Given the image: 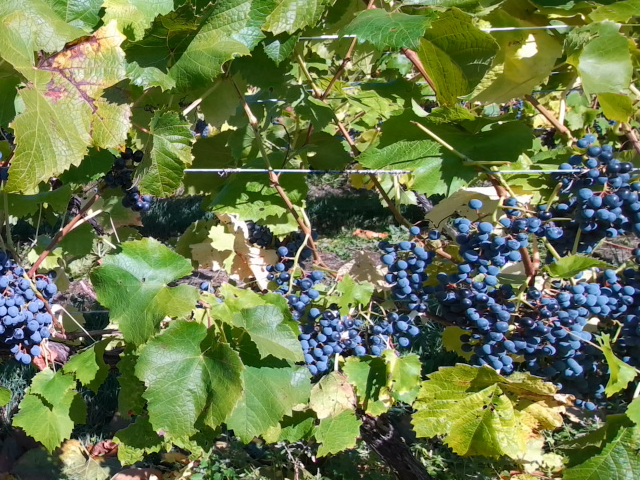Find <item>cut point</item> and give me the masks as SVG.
<instances>
[{"label": "cut point", "mask_w": 640, "mask_h": 480, "mask_svg": "<svg viewBox=\"0 0 640 480\" xmlns=\"http://www.w3.org/2000/svg\"><path fill=\"white\" fill-rule=\"evenodd\" d=\"M308 239H309V235L305 234L304 237L301 240V247H297L295 249V257L296 258H299L300 255H302L303 252L306 250V242L308 241Z\"/></svg>", "instance_id": "cut-point-1"}, {"label": "cut point", "mask_w": 640, "mask_h": 480, "mask_svg": "<svg viewBox=\"0 0 640 480\" xmlns=\"http://www.w3.org/2000/svg\"><path fill=\"white\" fill-rule=\"evenodd\" d=\"M527 286H528V284H527V279H525V281L522 283L521 288H520V291H519V293H518V300H519V301H522V300H523V296H524V293H525V291H526Z\"/></svg>", "instance_id": "cut-point-2"}]
</instances>
